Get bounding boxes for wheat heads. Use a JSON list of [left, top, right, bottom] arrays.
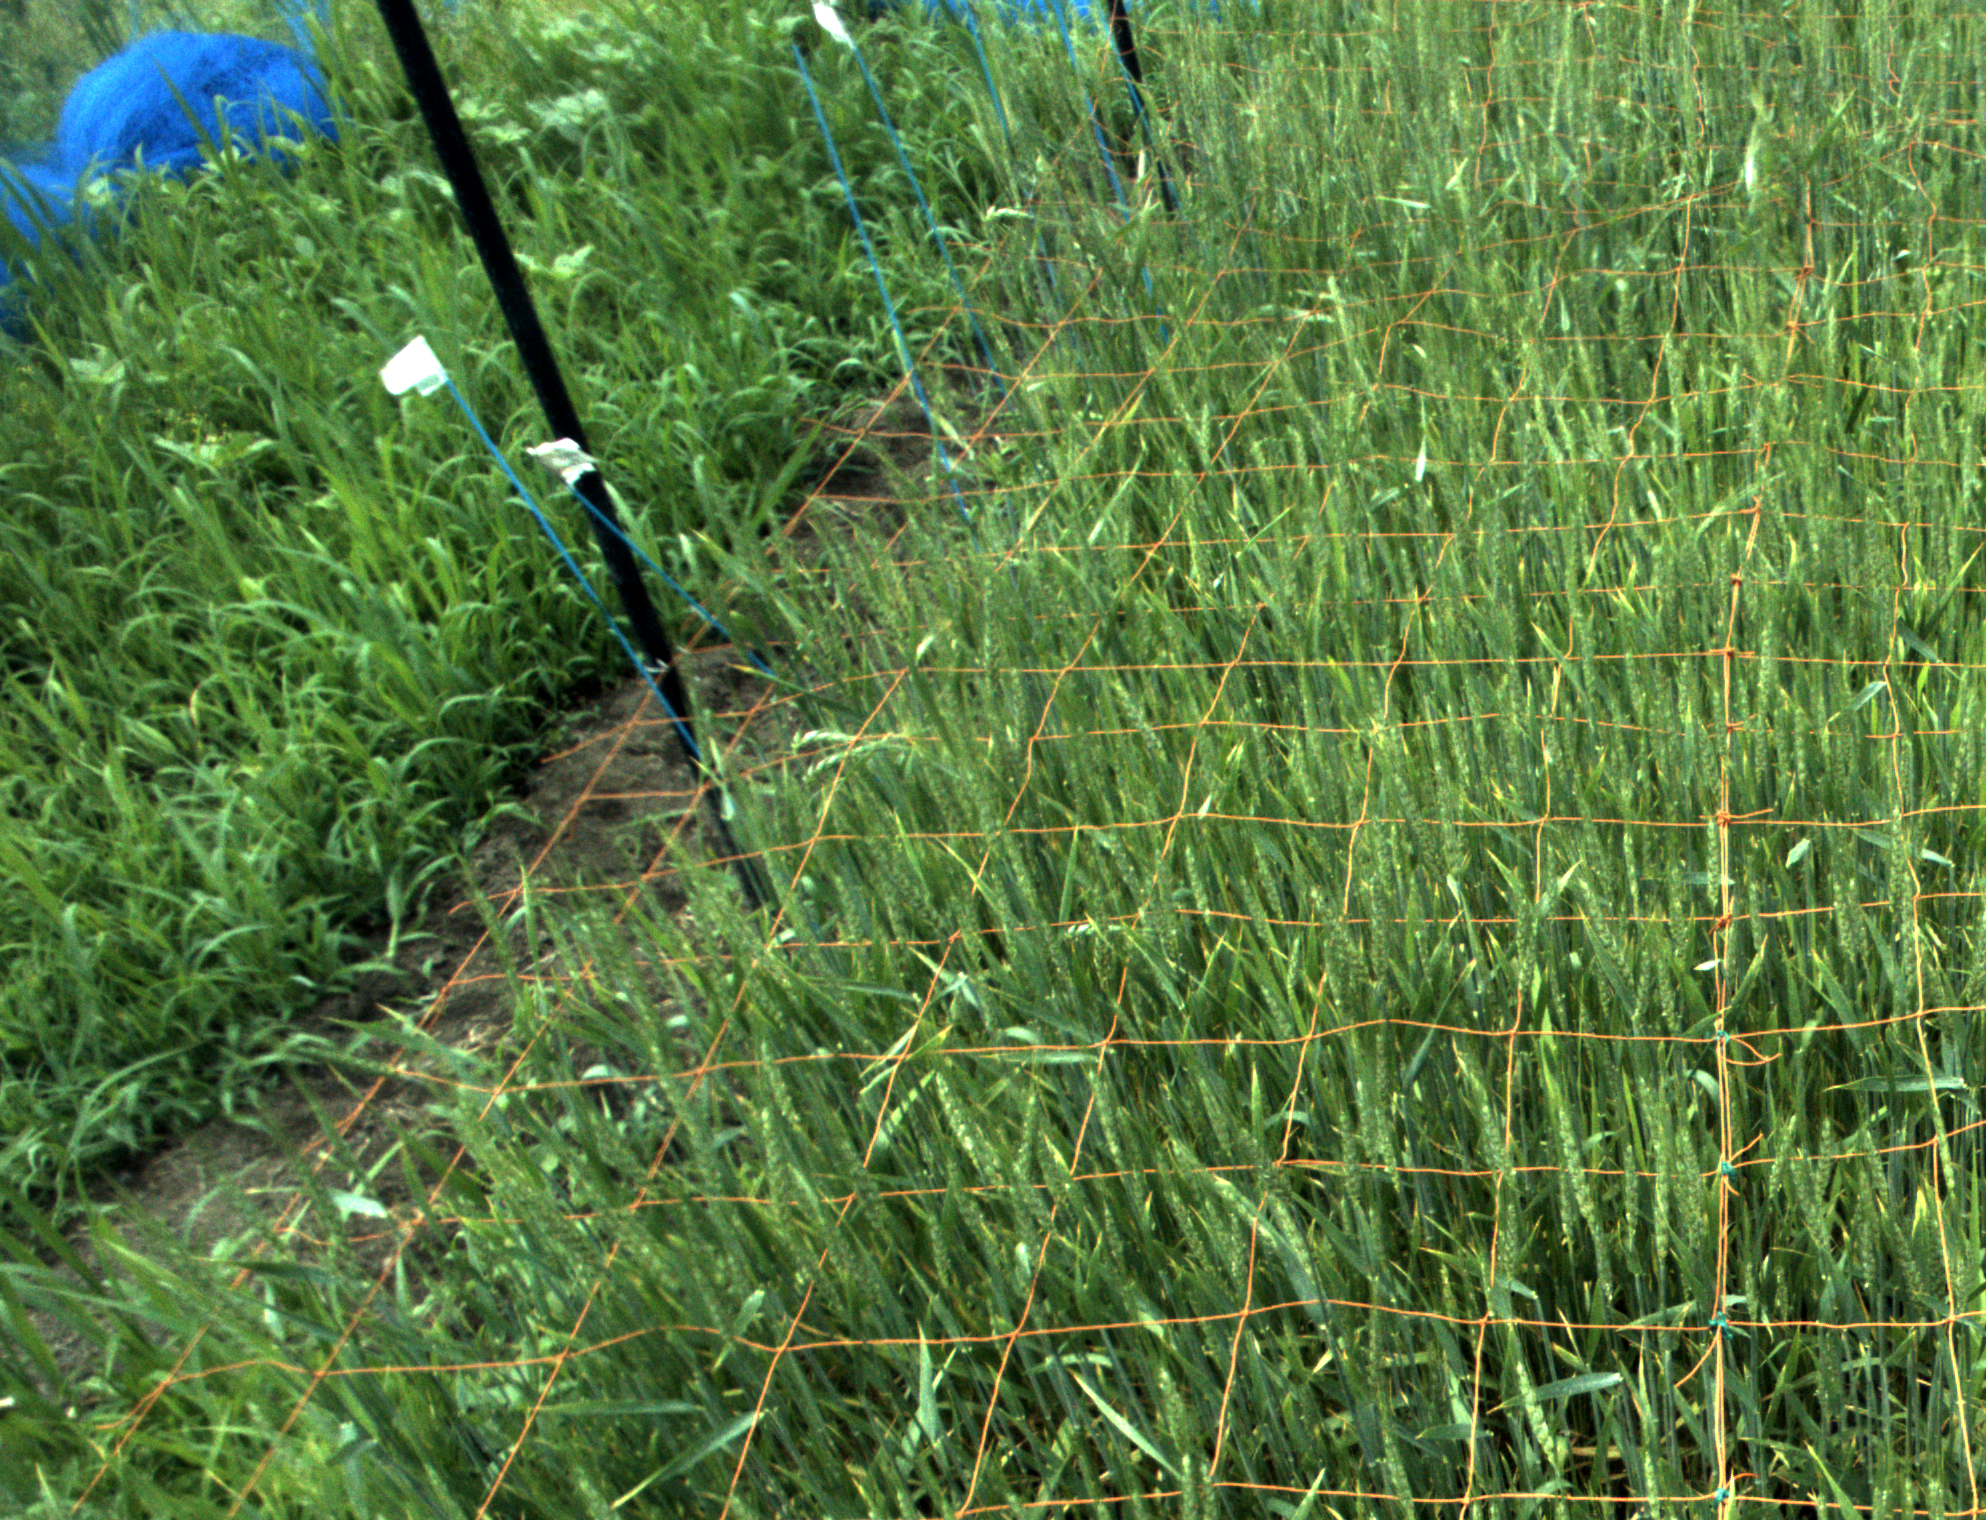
[[1737, 675, 1753, 749], [1881, 20, 1892, 79], [912, 201, 930, 250], [761, 1039, 802, 1122], [940, 1495, 982, 1520], [1238, 873, 1271, 942], [1563, 277, 1589, 329], [1422, 106, 1445, 155], [1289, 429, 1307, 481], [1352, 356, 1381, 412], [1358, 163, 1375, 213], [1256, 146, 1272, 217], [1645, 692, 1685, 805], [1676, 1159, 1713, 1254], [1754, 715, 1768, 788], [1871, 209, 1888, 252], [1756, 620, 1776, 712], [1448, 568, 1473, 642], [1661, 329, 1685, 406], [540, 904, 578, 972], [1429, 170, 1450, 227], [854, 846, 904, 901], [1605, 19, 1623, 92], [1473, 395, 1485, 433], [1365, 151, 1388, 218], [1681, 542, 1697, 590], [1168, 1138, 1197, 1188], [1869, 31, 1882, 92], [1869, 99, 1879, 137], [1221, 63, 1254, 181], [1226, 1206, 1250, 1300], [864, 842, 949, 934], [1915, 91, 1937, 143], [1355, 1077, 1382, 1177], [1316, 60, 1331, 106], [1259, 985, 1294, 1039], [637, 880, 700, 962], [691, 874, 746, 954], [1143, 342, 1197, 429], [1304, 78, 1325, 134], [1073, 279, 1100, 327], [1978, 722, 1986, 800], [1545, 54, 1564, 129], [446, 1100, 500, 1168], [1328, 156, 1356, 204], [1679, 346, 1701, 391], [1338, 1194, 1356, 1233], [1506, 654, 1530, 733], [1295, 740, 1323, 806], [1369, 812, 1392, 885], [954, 902, 981, 962], [1516, 894, 1529, 959], [1127, 985, 1148, 1030], [1834, 516, 1848, 588], [1062, 414, 1074, 474], [1879, 581, 1896, 638], [1635, 20, 1653, 90], [1084, 1069, 1129, 1169], [820, 594, 849, 658], [1677, 511, 1709, 592], [934, 1072, 977, 1151], [837, 1135, 893, 1224], [1807, 159, 1828, 224], [1659, 145, 1674, 191], [1845, 877, 1871, 961], [996, 815, 1039, 909], [1833, 736, 1846, 797], [1336, 37, 1356, 81], [1373, 1032, 1395, 1122], [929, 378, 963, 432], [1075, 579, 1094, 630], [1103, 1206, 1123, 1252], [1697, 722, 1724, 805], [1534, 26, 1547, 83], [1479, 1103, 1521, 1189], [1539, 702, 1570, 782], [588, 929, 622, 987], [1438, 1263, 1462, 1332], [1372, 373, 1403, 427], [1500, 28, 1526, 105], [836, 874, 867, 946], [919, 758, 970, 838], [1631, 951, 1655, 1024], [1449, 90, 1465, 131], [155, 1280, 265, 1362], [20, 1498, 113, 1520], [1041, 917, 1074, 988], [722, 1243, 750, 1293], [1509, 582, 1537, 659], [1738, 269, 1751, 301], [1528, 392, 1566, 463], [1963, 686, 1984, 798], [1517, 918, 1539, 996], [1257, 853, 1285, 919], [1501, 306, 1519, 356], [1308, 882, 1372, 981], [1555, 411, 1577, 455], [1198, 1077, 1233, 1157], [1141, 867, 1181, 957], [1366, 870, 1391, 983], [987, 318, 1016, 371], [836, 542, 905, 640], [1067, 412, 1098, 449], [1814, 434, 1832, 477], [1462, 678, 1490, 778], [291, 1044, 405, 1080], [1921, 1211, 1947, 1305], [1160, 68, 1183, 110], [1905, 507, 1918, 555], [1712, 686, 1731, 756], [1569, 612, 1601, 701], [1790, 1149, 1831, 1249], [217, 1172, 293, 1258], [1490, 296, 1506, 332], [1961, 425, 1976, 502], [1476, 949, 1506, 1029], [1422, 1338, 1450, 1421], [1107, 680, 1169, 765], [1733, 30, 1749, 68], [1049, 444, 1076, 503], [1019, 259, 1035, 310], [1715, 30, 1737, 69], [1822, 668, 1853, 703], [1341, 781, 1364, 828], [1104, 831, 1151, 906], [1060, 346, 1074, 400], [1816, 694, 1833, 776], [1434, 92, 1452, 143], [1743, 1263, 1760, 1322], [1812, 416, 1831, 484], [1623, 648, 1648, 721], [1895, 33, 1920, 111], [1270, 258, 1284, 303], [1392, 725, 1408, 782], [692, 1265, 738, 1350], [1889, 806, 1907, 916], [1155, 1363, 1201, 1451], [520, 1188, 603, 1267], [706, 492, 752, 564], [952, 1184, 1003, 1263], [1930, 507, 1938, 556], [1495, 56, 1510, 122], [1323, 758, 1343, 819], [1747, 882, 1766, 953], [1936, 44, 1947, 125], [1168, 443, 1214, 519], [1455, 789, 1468, 846], [735, 953, 789, 1029], [172, 1249, 302, 1357], [1266, 1190, 1324, 1296], [1559, 22, 1573, 65], [1414, 932, 1437, 992], [1844, 537, 1862, 584], [1046, 30, 1087, 117], [1666, 555, 1680, 655], [1891, 1219, 1928, 1313], [1363, 1323, 1389, 1391], [1002, 156, 1022, 206], [1681, 83, 1698, 168], [1638, 816, 1663, 872], [1783, 389, 1798, 426], [1872, 1481, 1886, 1520], [707, 882, 798, 1000], [985, 710, 1024, 782], [726, 1492, 786, 1520], [1794, 31, 1823, 79], [1267, 102, 1291, 188], [1586, 54, 1621, 143], [1064, 507, 1093, 568], [1494, 687, 1518, 766], [1383, 1428, 1419, 1520], [1536, 301, 1548, 335], [1748, 275, 1758, 325], [1196, 750, 1223, 807], [888, 204, 914, 247], [1649, 1139, 1673, 1262], [1935, 515, 1949, 584], [1284, 935, 1302, 998], [1930, 1100, 1957, 1192], [1492, 365, 1517, 414], [1701, 72, 1712, 127], [1295, 1384, 1320, 1428], [866, 537, 911, 614], [1926, 962, 1952, 1046], [1145, 790, 1165, 844], [1489, 506, 1507, 606], [1675, 660, 1692, 717], [1235, 35, 1256, 99], [1338, 1108, 1366, 1201], [764, 850, 800, 931], [1814, 1492, 1836, 1520], [1399, 545, 1418, 609], [1608, 745, 1621, 789], [1174, 1451, 1199, 1520], [1851, 1195, 1866, 1234], [1773, 707, 1794, 779], [1085, 66, 1113, 126], [1287, 143, 1297, 175], [1337, 390, 1359, 495], [578, 1178, 681, 1289], [1204, 1198, 1227, 1249], [880, 892, 910, 950], [1495, 1227, 1509, 1269], [1752, 405, 1770, 445], [1350, 84, 1361, 139], [1862, 1127, 1892, 1205], [686, 1093, 729, 1198], [1472, 1501, 1488, 1520], [1169, 303, 1197, 357], [1556, 1157, 1577, 1240], [1908, 216, 1928, 258], [1199, 405, 1214, 453], [1641, 1451, 1661, 1518], [1239, 1126, 1295, 1203], [1175, 58, 1207, 146], [1898, 1476, 1917, 1520], [1258, 62, 1274, 94], [1183, 695, 1209, 748], [1825, 303, 1841, 363], [1816, 1348, 1841, 1420], [1520, 420, 1541, 535], [1010, 665, 1025, 755], [1422, 537, 1447, 648], [1159, 128, 1184, 186], [1759, 465, 1792, 549], [453, 1192, 498, 1276], [1935, 405, 1950, 453], [1474, 441, 1494, 462], [590, 1123, 656, 1188], [927, 1213, 952, 1287], [1092, 1500, 1129, 1520], [630, 918, 682, 1000], [1479, 1129, 1502, 1171], [423, 1461, 509, 1520], [1431, 463, 1480, 577], [1390, 774, 1449, 883], [824, 552, 854, 599], [624, 948, 666, 1039], [1185, 844, 1215, 929], [1513, 110, 1531, 165], [784, 1224, 842, 1312], [286, 1152, 357, 1270], [1958, 1237, 1980, 1293], [1551, 970, 1570, 1037], [791, 1169, 828, 1225], [1575, 798, 1612, 880], [1147, 115, 1167, 161], [1736, 528, 1759, 621], [1277, 51, 1313, 103], [1693, 463, 1709, 509], [476, 885, 522, 972], [1593, 1219, 1615, 1288], [1575, 339, 1598, 391], [1706, 814, 1722, 907], [1764, 1113, 1799, 1204], [1427, 376, 1450, 421], [1102, 50, 1134, 118], [1009, 1160, 1061, 1239], [1191, 59, 1227, 147], [1121, 516, 1132, 551], [1520, 340, 1546, 382], [1129, 1166, 1147, 1214], [706, 964, 746, 1043], [1010, 1187, 1049, 1268], [1722, 923, 1737, 980], [1323, 935, 1355, 1019], [1440, 380, 1468, 433], [1863, 492, 1883, 584], [1621, 1142, 1642, 1237], [1154, 846, 1180, 923], [1494, 436, 1509, 475], [1831, 880, 1857, 964], [1237, 1201, 1280, 1264], [1857, 1221, 1878, 1290], [1110, 281, 1131, 321], [1857, 1169, 1883, 1240], [1067, 758, 1091, 824], [1547, 24, 1564, 67], [1834, 410, 1850, 453], [1089, 885, 1117, 979], [1558, 1105, 1600, 1225], [1303, 830, 1333, 877], [1253, 725, 1271, 792], [1664, 31, 1680, 97], [686, 892, 725, 950], [1962, 900, 1986, 1003], [1903, 404, 1915, 460], [1521, 294, 1535, 323], [1369, 1209, 1392, 1275], [1414, 20, 1431, 80], [1171, 465, 1200, 521], [963, 770, 1009, 860], [732, 1211, 752, 1251], [1327, 356, 1348, 442], [1298, 672, 1335, 783], [571, 1463, 661, 1520], [1844, 134, 1871, 209], [1730, 286, 1742, 327], [1596, 958, 1610, 1017], [1696, 361, 1714, 415], [905, 511, 957, 584], [1618, 286, 1642, 331], [1889, 986, 1903, 1034], [1657, 281, 1672, 321], [1655, 1299, 1669, 1347], [1431, 761, 1468, 881], [1622, 831, 1642, 899], [1332, 846, 1361, 869], [246, 1398, 312, 1481], [975, 972, 1001, 1031], [1619, 291, 1636, 338], [807, 596, 841, 666], [1812, 818, 1825, 853], [791, 890, 826, 959], [980, 574, 1003, 698], [759, 1108, 788, 1228], [1299, 499, 1331, 571], [1897, 107, 1922, 149], [1446, 702, 1474, 783], [1563, 556, 1586, 611], [1815, 1119, 1836, 1202], [1844, 604, 1857, 653], [1842, 699, 1859, 760], [1578, 877, 1640, 988], [1543, 503, 1562, 561], [1100, 527, 1125, 583], [1933, 335, 1950, 391], [1914, 816, 1926, 854], [1043, 583, 1071, 630], [1571, 498, 1588, 577], [1637, 735, 1652, 810], [829, 1222, 887, 1315], [1755, 387, 1781, 420], [997, 87, 1034, 170], [1468, 296, 1489, 323], [962, 894, 985, 943], [1191, 534, 1213, 588], [681, 1201, 724, 1277], [1719, 540, 1733, 603], [1562, 702, 1580, 771], [1732, 62, 1745, 118], [767, 506, 796, 586], [936, 648, 965, 722], [993, 872, 1024, 944], [1004, 1491, 1063, 1520], [1595, 403, 1614, 456], [1656, 957, 1681, 1034], [1608, 699, 1634, 787], [1616, 110, 1632, 202], [1949, 692, 1979, 798], [1299, 149, 1321, 211], [1272, 370, 1328, 439], [1042, 73, 1076, 138], [1130, 1486, 1166, 1520], [1281, 361, 1299, 421], [1515, 1358, 1558, 1469], [1387, 818, 1403, 880], [1007, 940, 1039, 1000], [1081, 113, 1108, 205], [1197, 1458, 1220, 1520], [969, 1121, 1007, 1189], [1957, 44, 1976, 106], [1564, 65, 1580, 136], [1110, 998, 1145, 1050], [1774, 152, 1810, 211], [1035, 1129, 1075, 1187], [1129, 594, 1155, 659], [584, 910, 631, 975], [1026, 560, 1047, 617], [1462, 414, 1479, 463], [1248, 437, 1272, 481], [1238, 756, 1263, 795], [1277, 536, 1302, 617], [1757, 505, 1781, 569], [1944, 494, 1963, 566], [1531, 131, 1541, 163], [1696, 503, 1728, 542], [1043, 357, 1064, 395], [1354, 533, 1372, 591], [1800, 480, 1820, 568], [1332, 590, 1354, 648], [1331, 95, 1343, 149], [1793, 704, 1811, 789], [1974, 37, 1986, 117], [1162, 1188, 1227, 1300], [1655, 552, 1666, 603], [1374, 1102, 1405, 1196], [1898, 874, 1918, 1031], [894, 1487, 938, 1520], [1357, 717, 1389, 764], [1754, 266, 1767, 321], [1017, 1090, 1040, 1175], [1677, 1122, 1711, 1213], [1542, 840, 1559, 921], [1217, 142, 1240, 224], [1578, 405, 1610, 460], [650, 1044, 694, 1130], [1638, 1071, 1670, 1144], [1668, 897, 1691, 952], [1379, 38, 1402, 88], [1634, 124, 1653, 185], [1201, 323, 1214, 362], [1899, 738, 1915, 795], [1107, 1275, 1171, 1344], [1723, 1069, 1746, 1152], [1835, 817, 1849, 849], [1727, 363, 1744, 416], [1367, 673, 1394, 756], [1210, 60, 1221, 99], [1368, 31, 1384, 90], [1926, 1477, 1949, 1520], [1312, 807, 1334, 850], [1504, 1201, 1523, 1270]]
